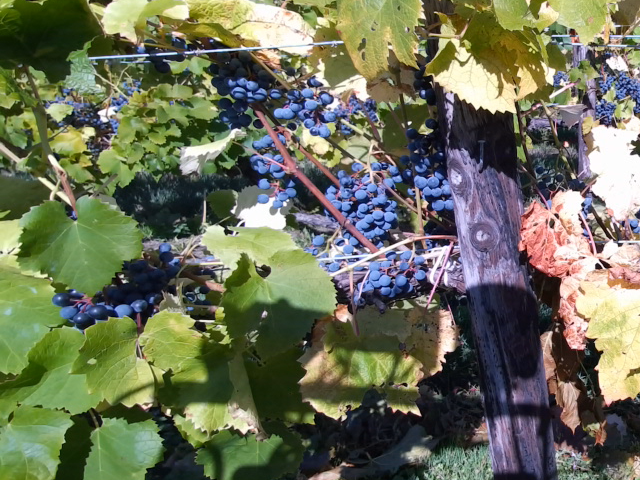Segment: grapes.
Masks as SVG:
<instances>
[{"mask_svg": "<svg viewBox=\"0 0 640 480\" xmlns=\"http://www.w3.org/2000/svg\"><path fill=\"white\" fill-rule=\"evenodd\" d=\"M406 137L413 140L408 143V149L417 153H413L410 158L402 155L399 162L403 165L415 162L417 176L412 175L411 168L401 171L387 162H373L371 166L373 171L387 169L391 174V178L383 179L380 186L370 183L367 175L354 178L352 174L339 169L337 171V179L340 181L339 190L333 184L325 189L328 202L337 207L358 231L368 239L377 237L380 239L373 242L377 249H382L383 241L388 239L385 231L394 230L397 227L398 202L395 199H389L385 190L392 189L395 183L423 190L422 198L427 202L429 212L454 209V199L446 176L443 145L439 139L440 133L432 131L429 134H418L416 128H410L406 131ZM433 163H438L434 170L435 177H429L431 175L429 168Z\"/></svg>", "mask_w": 640, "mask_h": 480, "instance_id": "1", "label": "grapes"}, {"mask_svg": "<svg viewBox=\"0 0 640 480\" xmlns=\"http://www.w3.org/2000/svg\"><path fill=\"white\" fill-rule=\"evenodd\" d=\"M174 246L169 242L158 245L157 259L164 261L167 268H151L147 261L131 262L128 265V273L133 276L134 284H122L120 288L110 287L108 298L117 303L106 304L99 301L94 306L78 303L74 306H66L70 298H83V293L68 289L66 292H57L52 297L54 306L61 307L60 316L75 323V329L83 331L91 327L96 321H108L109 317L123 318L132 314H142L149 305H157L164 299L161 292L167 282L180 273V260L172 259Z\"/></svg>", "mask_w": 640, "mask_h": 480, "instance_id": "2", "label": "grapes"}, {"mask_svg": "<svg viewBox=\"0 0 640 480\" xmlns=\"http://www.w3.org/2000/svg\"><path fill=\"white\" fill-rule=\"evenodd\" d=\"M286 97L290 101H285L281 108H275L272 112L279 119L293 120L296 115L303 121V126L310 129L311 136H319L320 138H328L330 136V128L324 123L336 122V113L333 111H324L319 113L322 123L315 126L316 119L314 117L318 103L327 106L333 103L334 97L328 92L321 91L318 94L317 101L314 100V91L312 89H302L300 92L296 88H290L286 91Z\"/></svg>", "mask_w": 640, "mask_h": 480, "instance_id": "3", "label": "grapes"}, {"mask_svg": "<svg viewBox=\"0 0 640 480\" xmlns=\"http://www.w3.org/2000/svg\"><path fill=\"white\" fill-rule=\"evenodd\" d=\"M225 87L230 88V94L234 99H237L232 103L229 98L222 97L218 101L220 108L225 109L220 112V119L223 123H229V129H240L242 127H249L253 123L255 129H262L258 119H254L245 114L248 110V104H255L256 101H265L267 98V91L263 87H259L257 82L249 80L248 78L238 77L236 81L233 78H226L224 80Z\"/></svg>", "mask_w": 640, "mask_h": 480, "instance_id": "4", "label": "grapes"}, {"mask_svg": "<svg viewBox=\"0 0 640 480\" xmlns=\"http://www.w3.org/2000/svg\"><path fill=\"white\" fill-rule=\"evenodd\" d=\"M385 257L387 261L370 262V272L366 279L363 280L361 293L371 295L374 290L379 289V294L385 295L387 298H393L395 294H410L413 291V285L408 282V277L405 274H397L394 286L392 288L389 286L393 283L392 277L379 270L388 269L392 265V259L397 258V252L395 250H387Z\"/></svg>", "mask_w": 640, "mask_h": 480, "instance_id": "5", "label": "grapes"}, {"mask_svg": "<svg viewBox=\"0 0 640 480\" xmlns=\"http://www.w3.org/2000/svg\"><path fill=\"white\" fill-rule=\"evenodd\" d=\"M432 77L424 75L422 71L415 73L413 88L417 91V95L422 98L429 106H434L437 102V95L433 89Z\"/></svg>", "mask_w": 640, "mask_h": 480, "instance_id": "6", "label": "grapes"}, {"mask_svg": "<svg viewBox=\"0 0 640 480\" xmlns=\"http://www.w3.org/2000/svg\"><path fill=\"white\" fill-rule=\"evenodd\" d=\"M249 162L251 164V167L261 175H266L269 172L274 179L278 180H281L286 175V171L281 165H278L276 163H271L270 165H268L269 160L263 159L257 154H253L249 158Z\"/></svg>", "mask_w": 640, "mask_h": 480, "instance_id": "7", "label": "grapes"}, {"mask_svg": "<svg viewBox=\"0 0 640 480\" xmlns=\"http://www.w3.org/2000/svg\"><path fill=\"white\" fill-rule=\"evenodd\" d=\"M297 185V181L293 178H288L285 181L286 190H281L276 193V198L273 200L272 207L280 210L283 207V202H287L289 198H294L297 195V190L294 188Z\"/></svg>", "mask_w": 640, "mask_h": 480, "instance_id": "8", "label": "grapes"}, {"mask_svg": "<svg viewBox=\"0 0 640 480\" xmlns=\"http://www.w3.org/2000/svg\"><path fill=\"white\" fill-rule=\"evenodd\" d=\"M343 237H344L345 239H349V244H348V245H345V244H346V241H345L344 239L338 238V239L335 241V244H336L337 246H339V247H342V246H344V247H343V251H342V253H336V254H335V257H343V254H346V255H353V254H354V251H355V248H357V249H361V248L363 247V244H362L361 242H359V241H358L355 237H353L351 234H349L347 231H345V232L343 233Z\"/></svg>", "mask_w": 640, "mask_h": 480, "instance_id": "9", "label": "grapes"}, {"mask_svg": "<svg viewBox=\"0 0 640 480\" xmlns=\"http://www.w3.org/2000/svg\"><path fill=\"white\" fill-rule=\"evenodd\" d=\"M311 244L307 247H304V250L310 253L311 255H317L319 247H323L325 245V238L322 235H315L311 237Z\"/></svg>", "mask_w": 640, "mask_h": 480, "instance_id": "10", "label": "grapes"}, {"mask_svg": "<svg viewBox=\"0 0 640 480\" xmlns=\"http://www.w3.org/2000/svg\"><path fill=\"white\" fill-rule=\"evenodd\" d=\"M254 149H265V147H271L272 151H277L274 147L270 135H264L259 141L252 142Z\"/></svg>", "mask_w": 640, "mask_h": 480, "instance_id": "11", "label": "grapes"}, {"mask_svg": "<svg viewBox=\"0 0 640 480\" xmlns=\"http://www.w3.org/2000/svg\"><path fill=\"white\" fill-rule=\"evenodd\" d=\"M342 262H344V259H334L332 263L320 261L319 266L323 267L328 273H334L340 270V263Z\"/></svg>", "mask_w": 640, "mask_h": 480, "instance_id": "12", "label": "grapes"}, {"mask_svg": "<svg viewBox=\"0 0 640 480\" xmlns=\"http://www.w3.org/2000/svg\"><path fill=\"white\" fill-rule=\"evenodd\" d=\"M411 257H412L411 251H405L399 254L398 259L402 261V263L399 264L400 271H407L410 268V264L407 262L408 260H410Z\"/></svg>", "mask_w": 640, "mask_h": 480, "instance_id": "13", "label": "grapes"}, {"mask_svg": "<svg viewBox=\"0 0 640 480\" xmlns=\"http://www.w3.org/2000/svg\"><path fill=\"white\" fill-rule=\"evenodd\" d=\"M263 157H268L269 159H273L275 162L282 163L284 160L280 154H272V153H264Z\"/></svg>", "mask_w": 640, "mask_h": 480, "instance_id": "14", "label": "grapes"}, {"mask_svg": "<svg viewBox=\"0 0 640 480\" xmlns=\"http://www.w3.org/2000/svg\"><path fill=\"white\" fill-rule=\"evenodd\" d=\"M323 215L328 217L330 222L332 223H337V219L335 217H333L330 213V211H328L326 208H323Z\"/></svg>", "mask_w": 640, "mask_h": 480, "instance_id": "15", "label": "grapes"}, {"mask_svg": "<svg viewBox=\"0 0 640 480\" xmlns=\"http://www.w3.org/2000/svg\"><path fill=\"white\" fill-rule=\"evenodd\" d=\"M360 286H361V282L357 283L356 288H357L358 292L354 293V295H353L354 306H356V302H357V299H358V296H359V293H360Z\"/></svg>", "mask_w": 640, "mask_h": 480, "instance_id": "16", "label": "grapes"}]
</instances>
